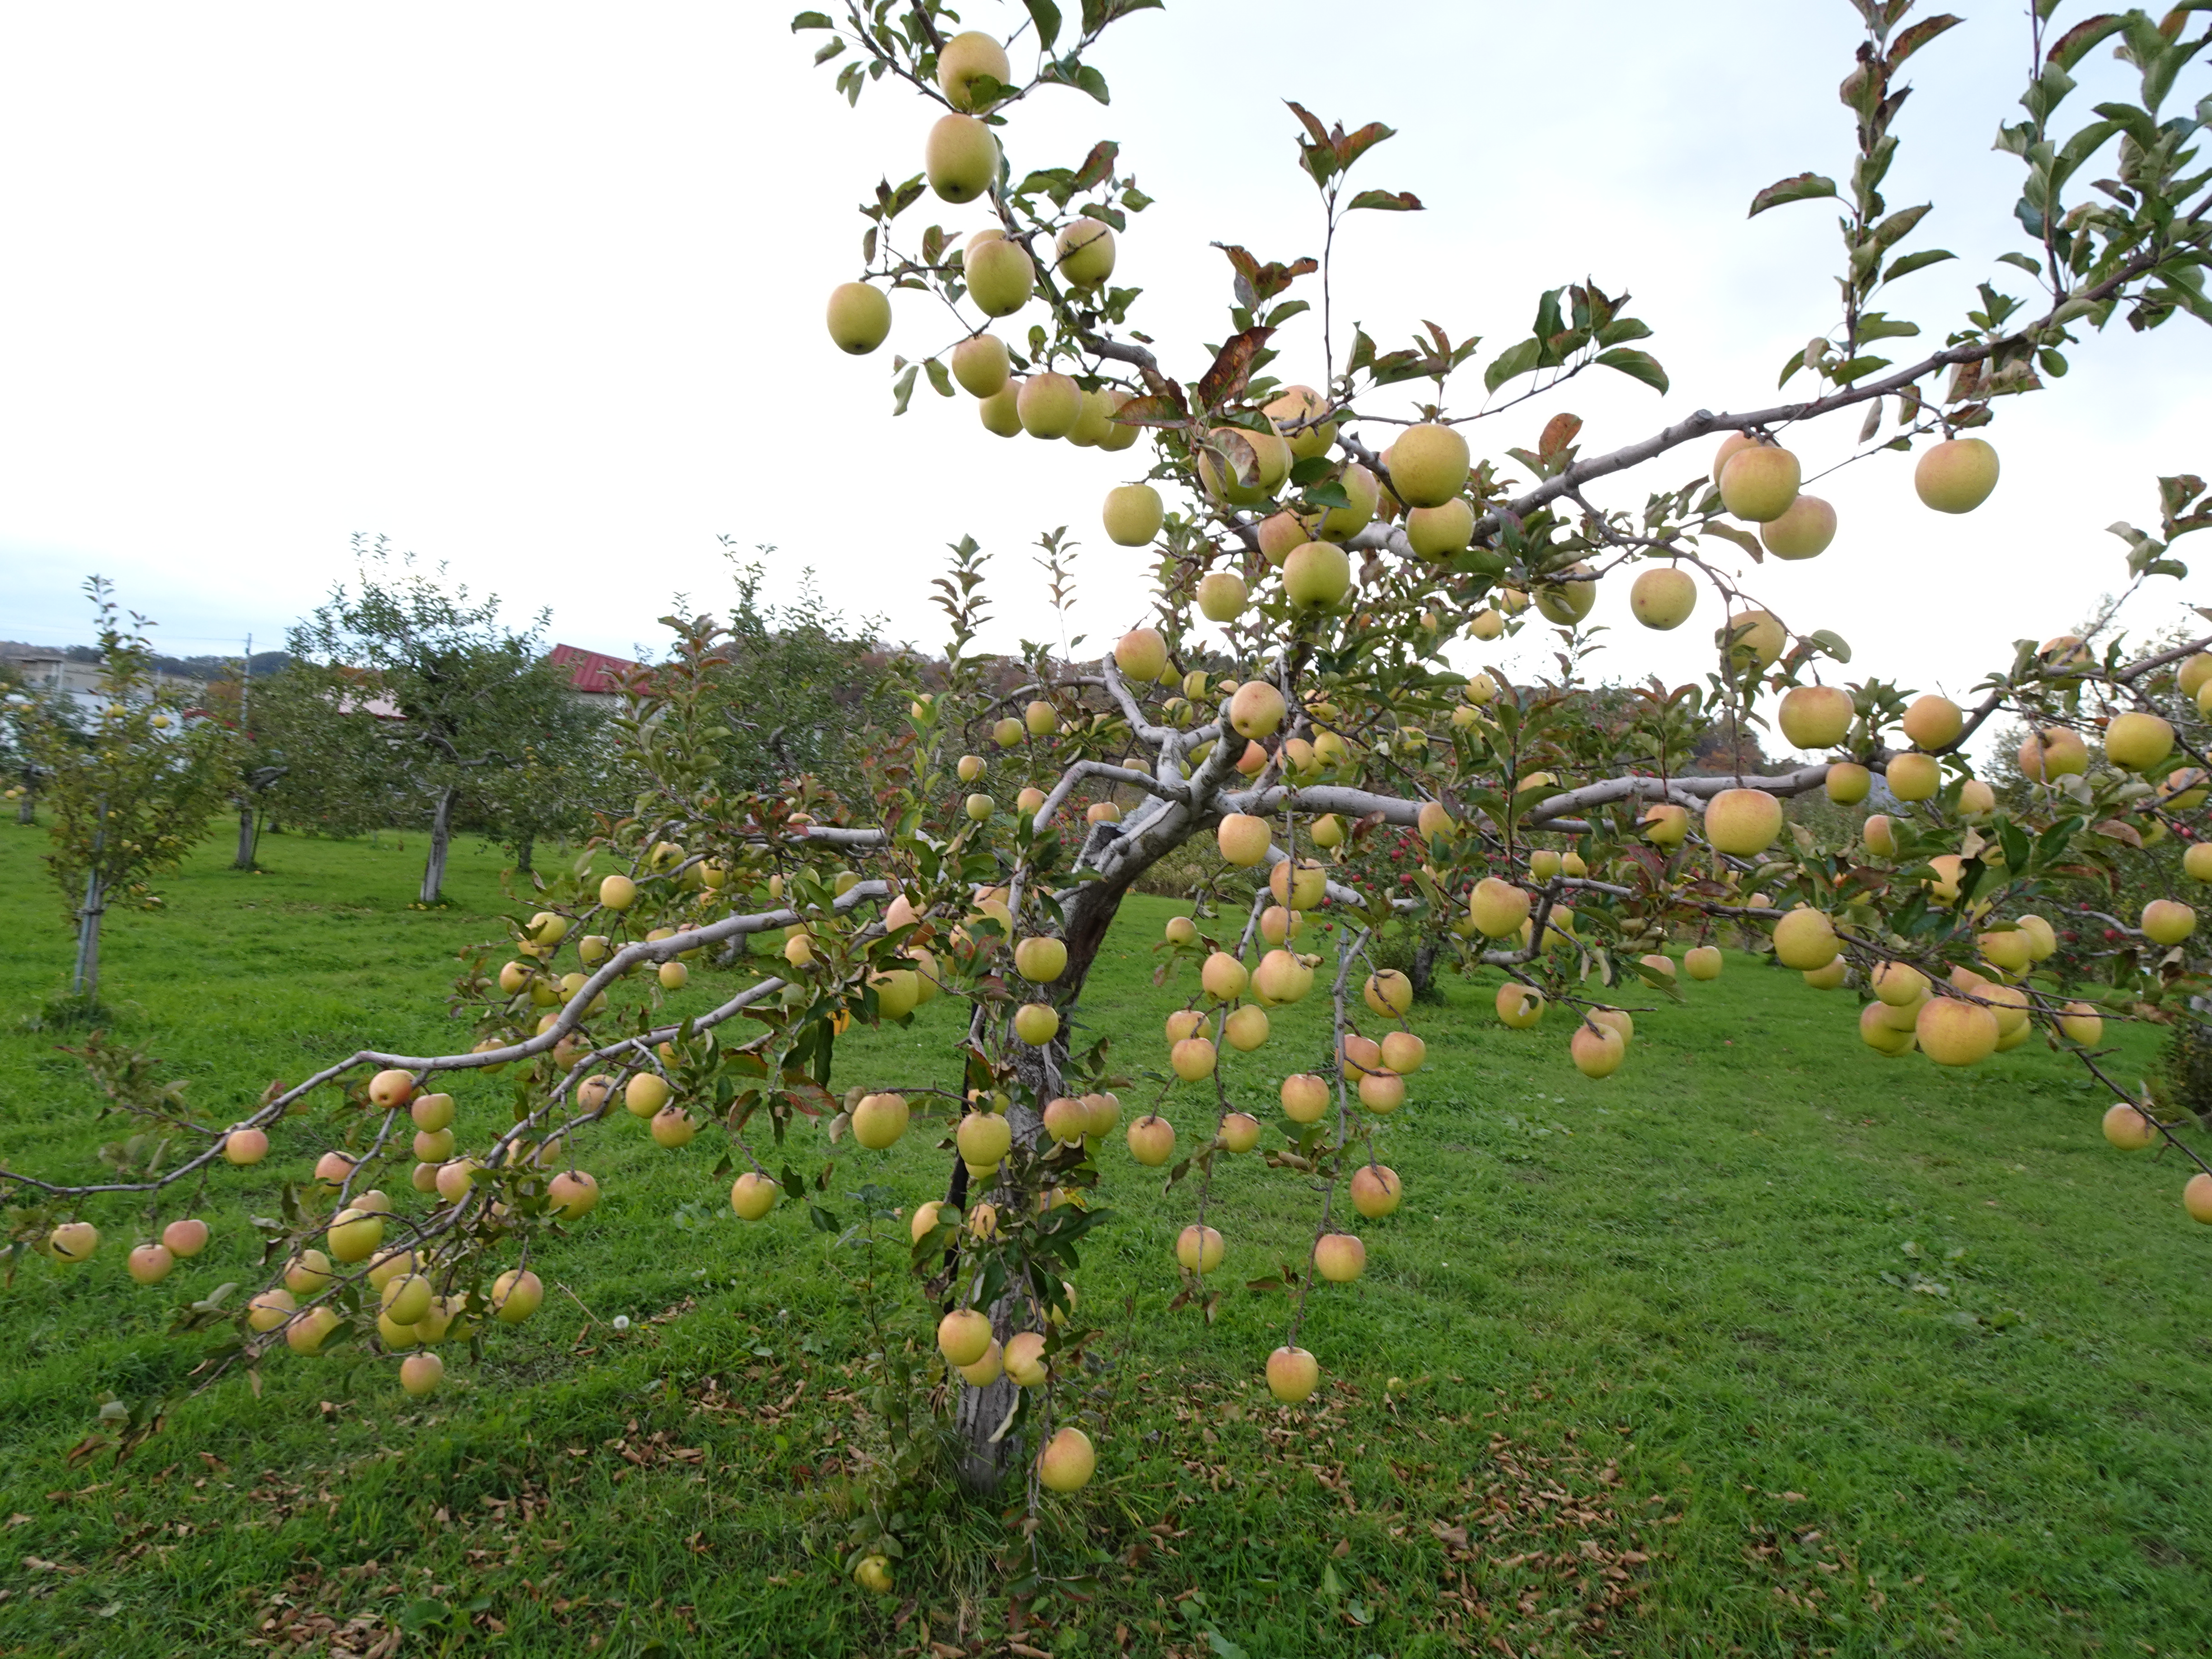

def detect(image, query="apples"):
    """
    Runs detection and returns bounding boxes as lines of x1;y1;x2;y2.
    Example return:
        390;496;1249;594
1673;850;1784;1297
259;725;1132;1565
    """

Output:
966;794;994;821
1176;1225;1224;1274
578;935;610;967
1876;1035;1917;1057
993;717;1023;747
731;1172;776;1221
1388;423;1470;508
1501;588;1529;615
283;1249;331;1295
1405;497;1474;564
1189;739;1217;765
1090;713;1114;733
1303;689;1329;711
2141;899;2195;946
1179;759;1191;780
1265;1346;1319;1403
1250;966;1277;1008
924;113;998;203
1280;1074;1330;1124
1415;689;1432;700
885;891;936;932
1719;446;1801;523
1165;916;1197;947
1914;438;1999;514
1358;1068;1404;1115
1388;686;1409;702
247;1289;296;1333
1056;219;1116;290
962;229;1006;267
851;1093;909;1149
378;1308;420;1350
651;1107;695;1149
1261;385;1338;462
1114;628;1167;681
559;973;590;1005
896;949;939;1005
1860;1001;1909;1052
896;937;937;955
957;1111;1011;1166
1956;778;1995;815
499;961;535;995
1451;704;1483;732
1760;495;1837;560
1229;680;1286;739
530;973;561;1007
1394;726;1428;749
1372;445;1400;503
964;899;1012;944
1127;1115;1175;1167
1863;814;1901;857
678;948;701;960
1726;871;1744;885
1257;502;1324;569
1779;685;1854;749
1305;748;1325;777
1197;414;1286;505
1833;872;1871;906
315;1150;357;1196
659;962;688;990
226;1129;268;1165
2177;652;2212;699
349;1190;391;1224
968;1203;1013;1242
1630;568;1697;630
1471;609;1503;641
964;240;1035;317
658;1041;683;1070
2101;1102;2157;1151
1363;969;1412;1019
1420;612;1437;633
1219;1112;1258;1153
698;886;718;910
368;1247;420;1293
576;1074;620;1118
671;862;701;889
1087;801;1121;828
1269;442;1293;495
411;1093;455;1134
1545;772;1559;786
553;1033;593;1074
2039;636;2094;691
1302;462;1378;543
2197;677;2212;721
826;282;892;354
787;812;817;826
1704;788;1782;858
1561;849;1588;878
1421;863;1452;888
1097;390;1142;451
1418;800;1464;845
1870;960;1923;1007
580;989;607;1018
1555;926;1578;945
491;1269;542;1323
1469;877;1530;938
768;872;793;898
1079;1091;1120;1138
1258;949;1314;1004
368;1069;416;1109
971;886;1010;905
834;870;862;897
1318;700;1338;722
1004;1332;1053;1386
1534;561;1596;625
651;841;684;875
1165;1010;1212;1048
2003;960;2031;985
1161;697;1194;731
1994;1017;2031;1052
1158;657;1184;687
1245;760;1269;780
1952;962;2004;994
327;1208;382;1263
472;1038;508;1074
1540;915;1558;954
1492;721;1501;732
452;1291;494;1341
1479;718;1493;736
1904;695;1962;750
1516;771;1550;793
1014;1003;1059;1046
698;856;733;889
1528;870;1550;887
1381;1031;1425;1074
163;1219;208;1258
2182;842;2212;883
517;924;554;958
413;1128;454;1164
1802;953;1847;990
381;1273;432;1326
1977;928;2032;972
1345;613;1372;628
412;1295;459;1345
1826;762;1871;806
287;1306;338;1357
615;941;644;974
128;1244;173;1285
1570;1022;1624;1078
1036;1281;1076;1326
784;934;820;966
1236;739;1267;774
1038;1187;1067;1213
2105;712;2174;772
1794;901;1816;909
412;1162;441;1193
1530;850;1561;879
1968;983;2029;1036
1964;895;1993;925
49;1222;97;1264
1978;845;2005;866
911;694;936;721
1886;752;1941;801
936;31;1010;113
1224;1004;1269;1051
2015;915;2056;962
1496;982;1544;1029
965;1147;1013;1180
1645;804;1688;848
1060;720;1080;735
979;378;1024;437
1043;1097;1090;1144
400;1352;443;1394
530;912;566;946
1310;813;1343;849
948;921;976;951
1584;1005;1633;1046
1335;1034;1381;1082
1549;903;1574;931
864;961;919;1019
1282;541;1350;611
479;1197;509;1220
1211;716;1220;726
1311;715;1343;736
645;927;677;941
2183;1173;2212;1226
1508;917;1533;948
910;1201;957;1249
1452;914;1476;939
1037;1427;1095;1493
1275;738;1313;774
1465;674;1495;706
676;923;703;934
1025;701;1058;734
1214;680;1239;703
1103;484;1163;547
940;950;962;976
547;1170;598;1221
1916;996;1999;1067
536;1013;560;1037
415;1248;441;1270
1183;671;1211;700
1773;908;1839;970
1201;951;1248;1002
784;920;817;942
1921;855;1963;905
1197;573;1247;622
1122;759;1151;776
1064;386;1116;447
952;334;1010;398
1882;987;1935;1032
958;1337;1004;1387
1638;954;1675;989
1314;731;1351;766
1218;813;1271;866
1016;372;1082;439
1315;1234;1365;1282
1260;905;1302;945
2053;1002;2102;1047
967;1088;1010;1116
1226;788;1242;793
938;1309;993;1366
1684;945;1722;981
599;875;636;911
2132;804;2167;846
790;868;821;887
1745;893;1770;908
538;1137;561;1164
1714;430;1778;489
1922;973;1932;991
1170;1037;1217;1082
625;1072;669;1119
1269;857;1327;911
436;1158;485;1205
2018;726;2088;785
1720;610;1786;671
2157;767;2210;808
1825;909;1855;949
1017;787;1048;816
1350;1165;1402;1219
1031;885;1055;899
957;755;987;783
1015;936;1067;982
